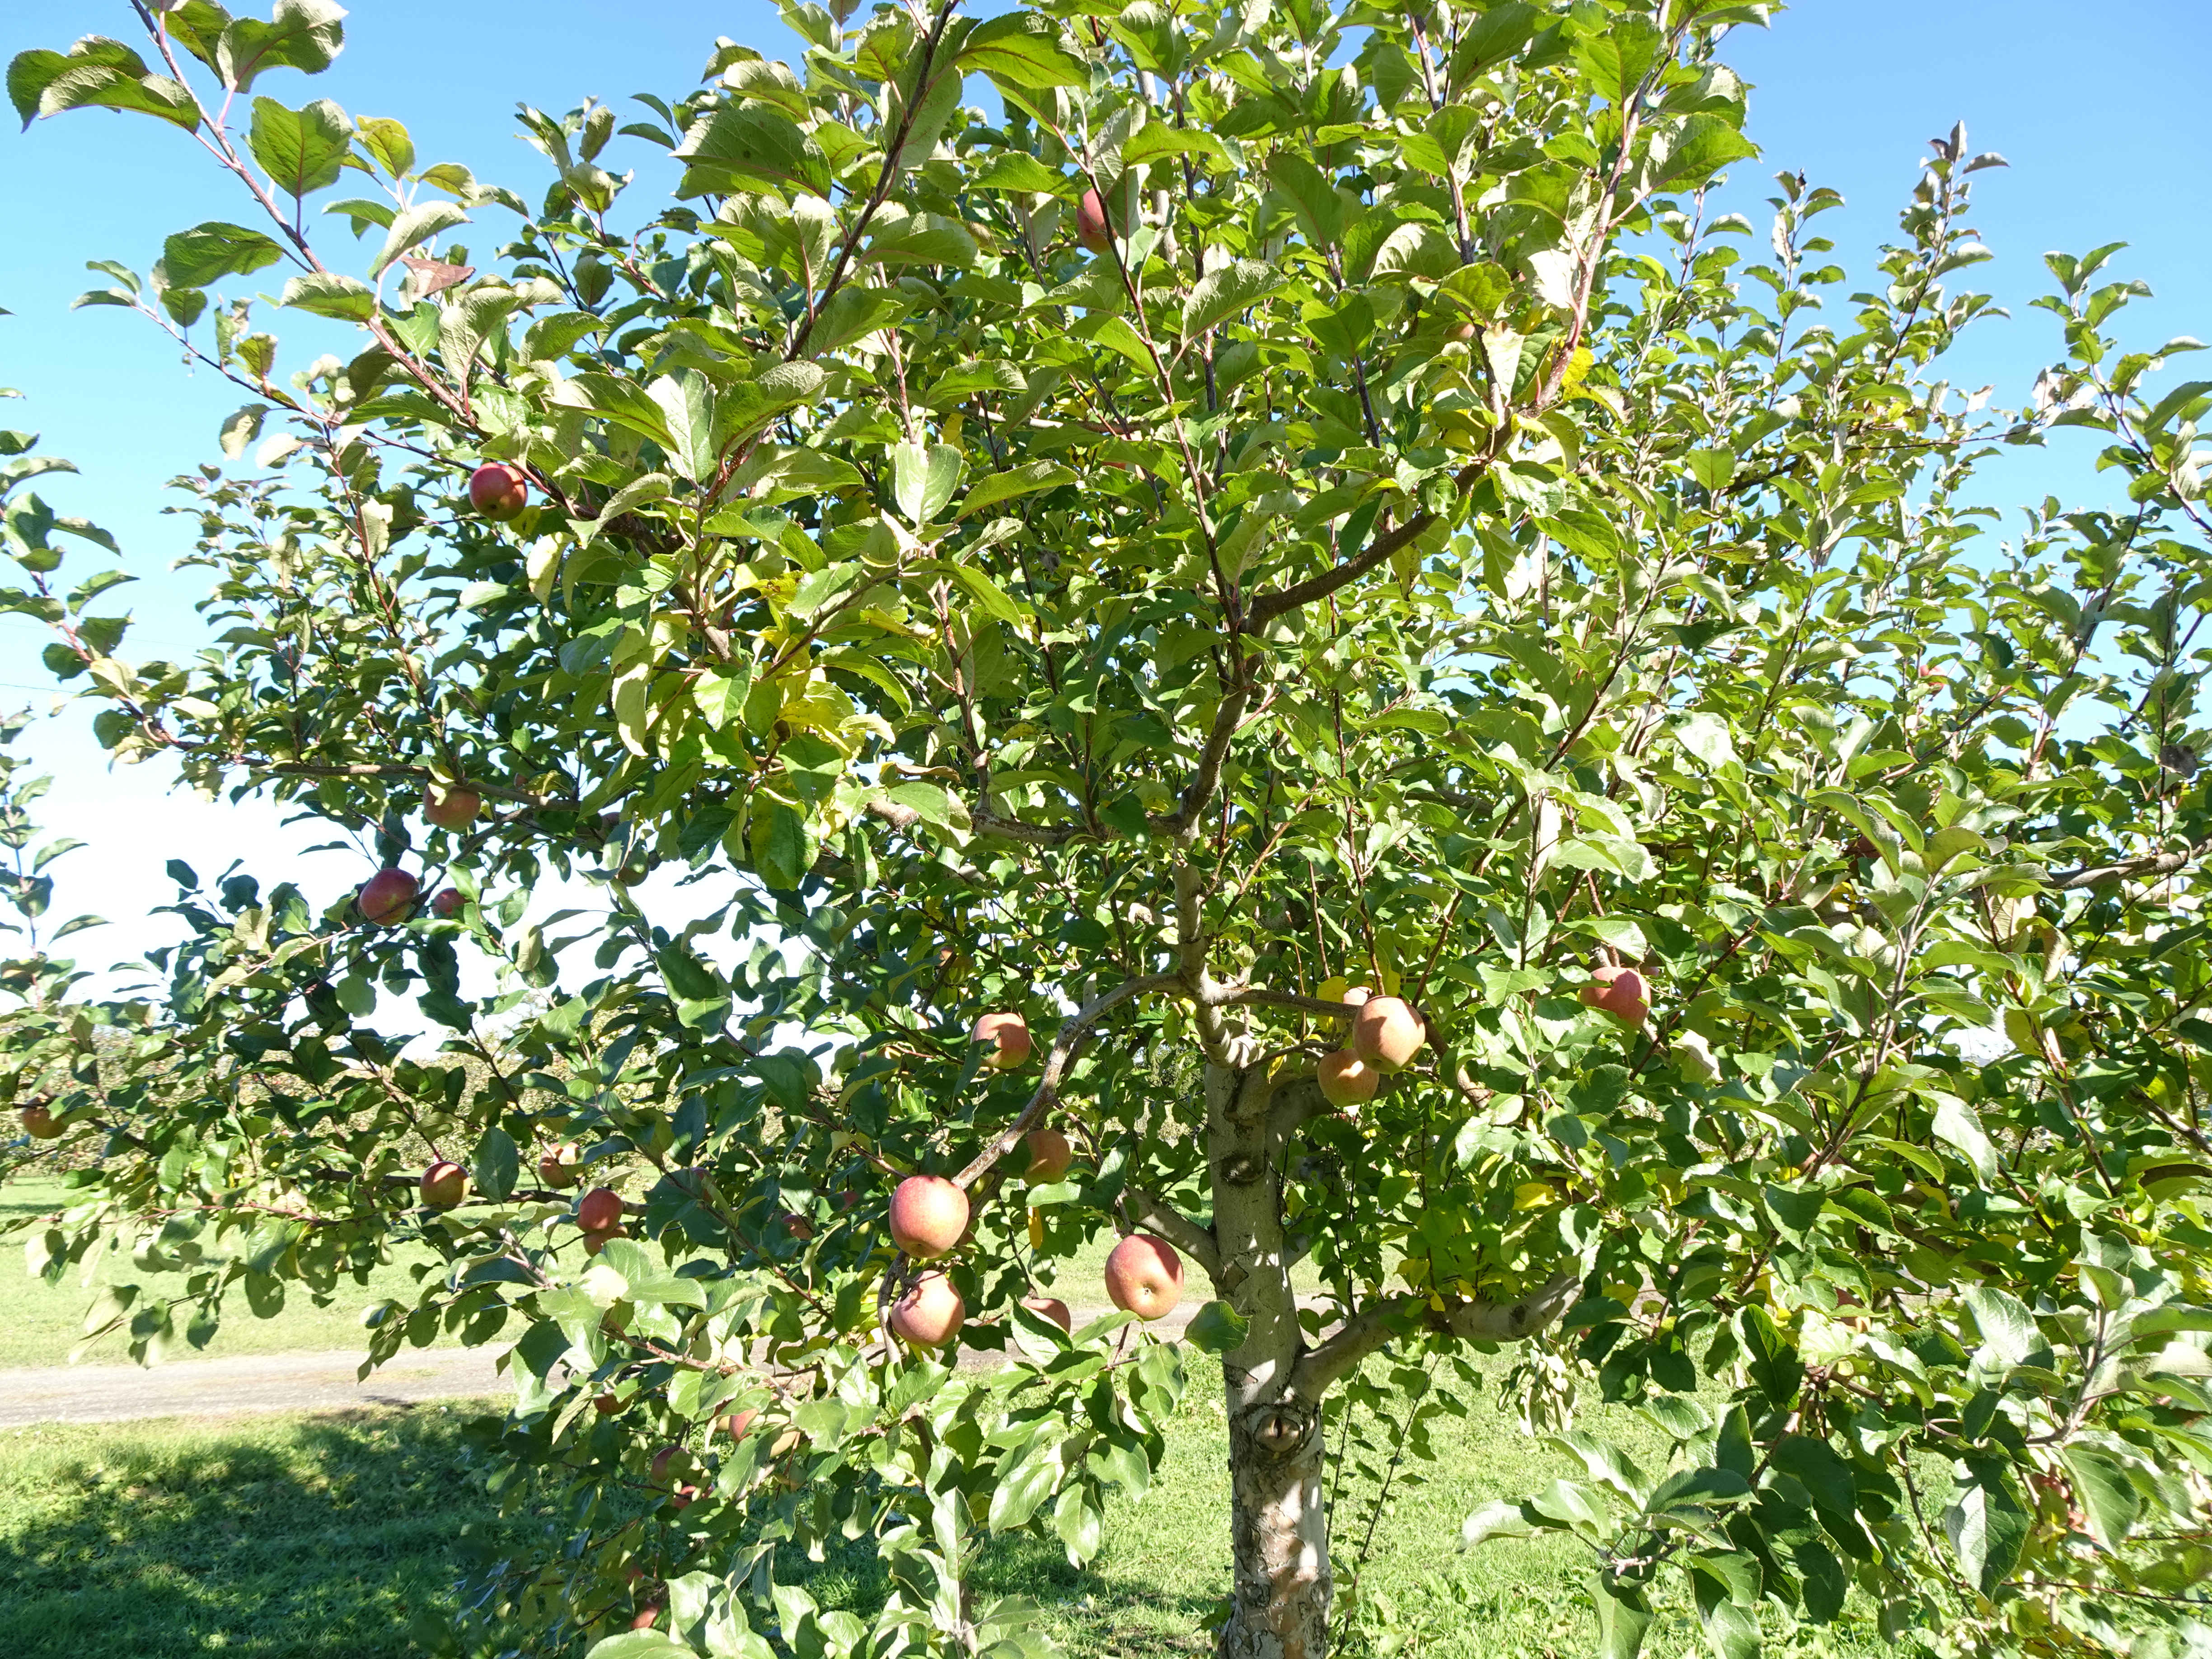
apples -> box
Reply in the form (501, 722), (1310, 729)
(574, 1187), (625, 1236)
(772, 1213), (820, 1262)
(467, 460), (529, 522)
(2048, 1506), (2104, 1556)
(422, 779), (483, 832)
(1009, 1294), (1072, 1347)
(1850, 833), (1898, 881)
(1638, 1320), (1661, 1341)
(1339, 1108), (1359, 1126)
(584, 1222), (629, 1266)
(417, 1161), (472, 1213)
(1790, 1381), (1827, 1422)
(2026, 1472), (2070, 1514)
(1975, 1576), (2020, 1620)
(1420, 295), (1489, 354)
(889, 1173), (971, 1261)
(829, 1190), (876, 1233)
(600, 811), (633, 841)
(12, 1164), (19, 1173)
(77, 1151), (86, 1161)
(1766, 1428), (1793, 1452)
(967, 395), (1002, 419)
(22, 1096), (70, 1140)
(729, 1390), (801, 1462)
(969, 1013), (1032, 1071)
(1795, 1147), (1845, 1192)
(856, 1048), (884, 1073)
(928, 939), (973, 985)
(1576, 1319), (1602, 1342)
(1201, 838), (1226, 863)
(1507, 266), (1529, 290)
(1016, 1127), (1073, 1187)
(1807, 1282), (1868, 1341)
(358, 866), (422, 929)
(1405, 483), (1425, 505)
(1574, 963), (1652, 1036)
(703, 1396), (744, 1432)
(1620, 957), (1663, 996)
(609, 1552), (650, 1593)
(873, 1041), (915, 1075)
(611, 851), (650, 888)
(1105, 1235), (1185, 1321)
(1911, 662), (1947, 698)
(1072, 178), (1146, 257)
(629, 1605), (683, 1649)
(891, 1010), (929, 1040)
(590, 1375), (638, 1417)
(432, 886), (472, 930)
(946, 1240), (983, 1272)
(650, 1443), (696, 1492)
(534, 1140), (589, 1189)
(672, 1482), (719, 1524)
(1317, 1048), (1382, 1107)
(2007, 1590), (2076, 1659)
(887, 1268), (965, 1351)
(1353, 995), (1429, 1074)
(511, 763), (545, 794)
(673, 1163), (720, 1209)
(322, 405), (349, 432)
(1101, 450), (1131, 479)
